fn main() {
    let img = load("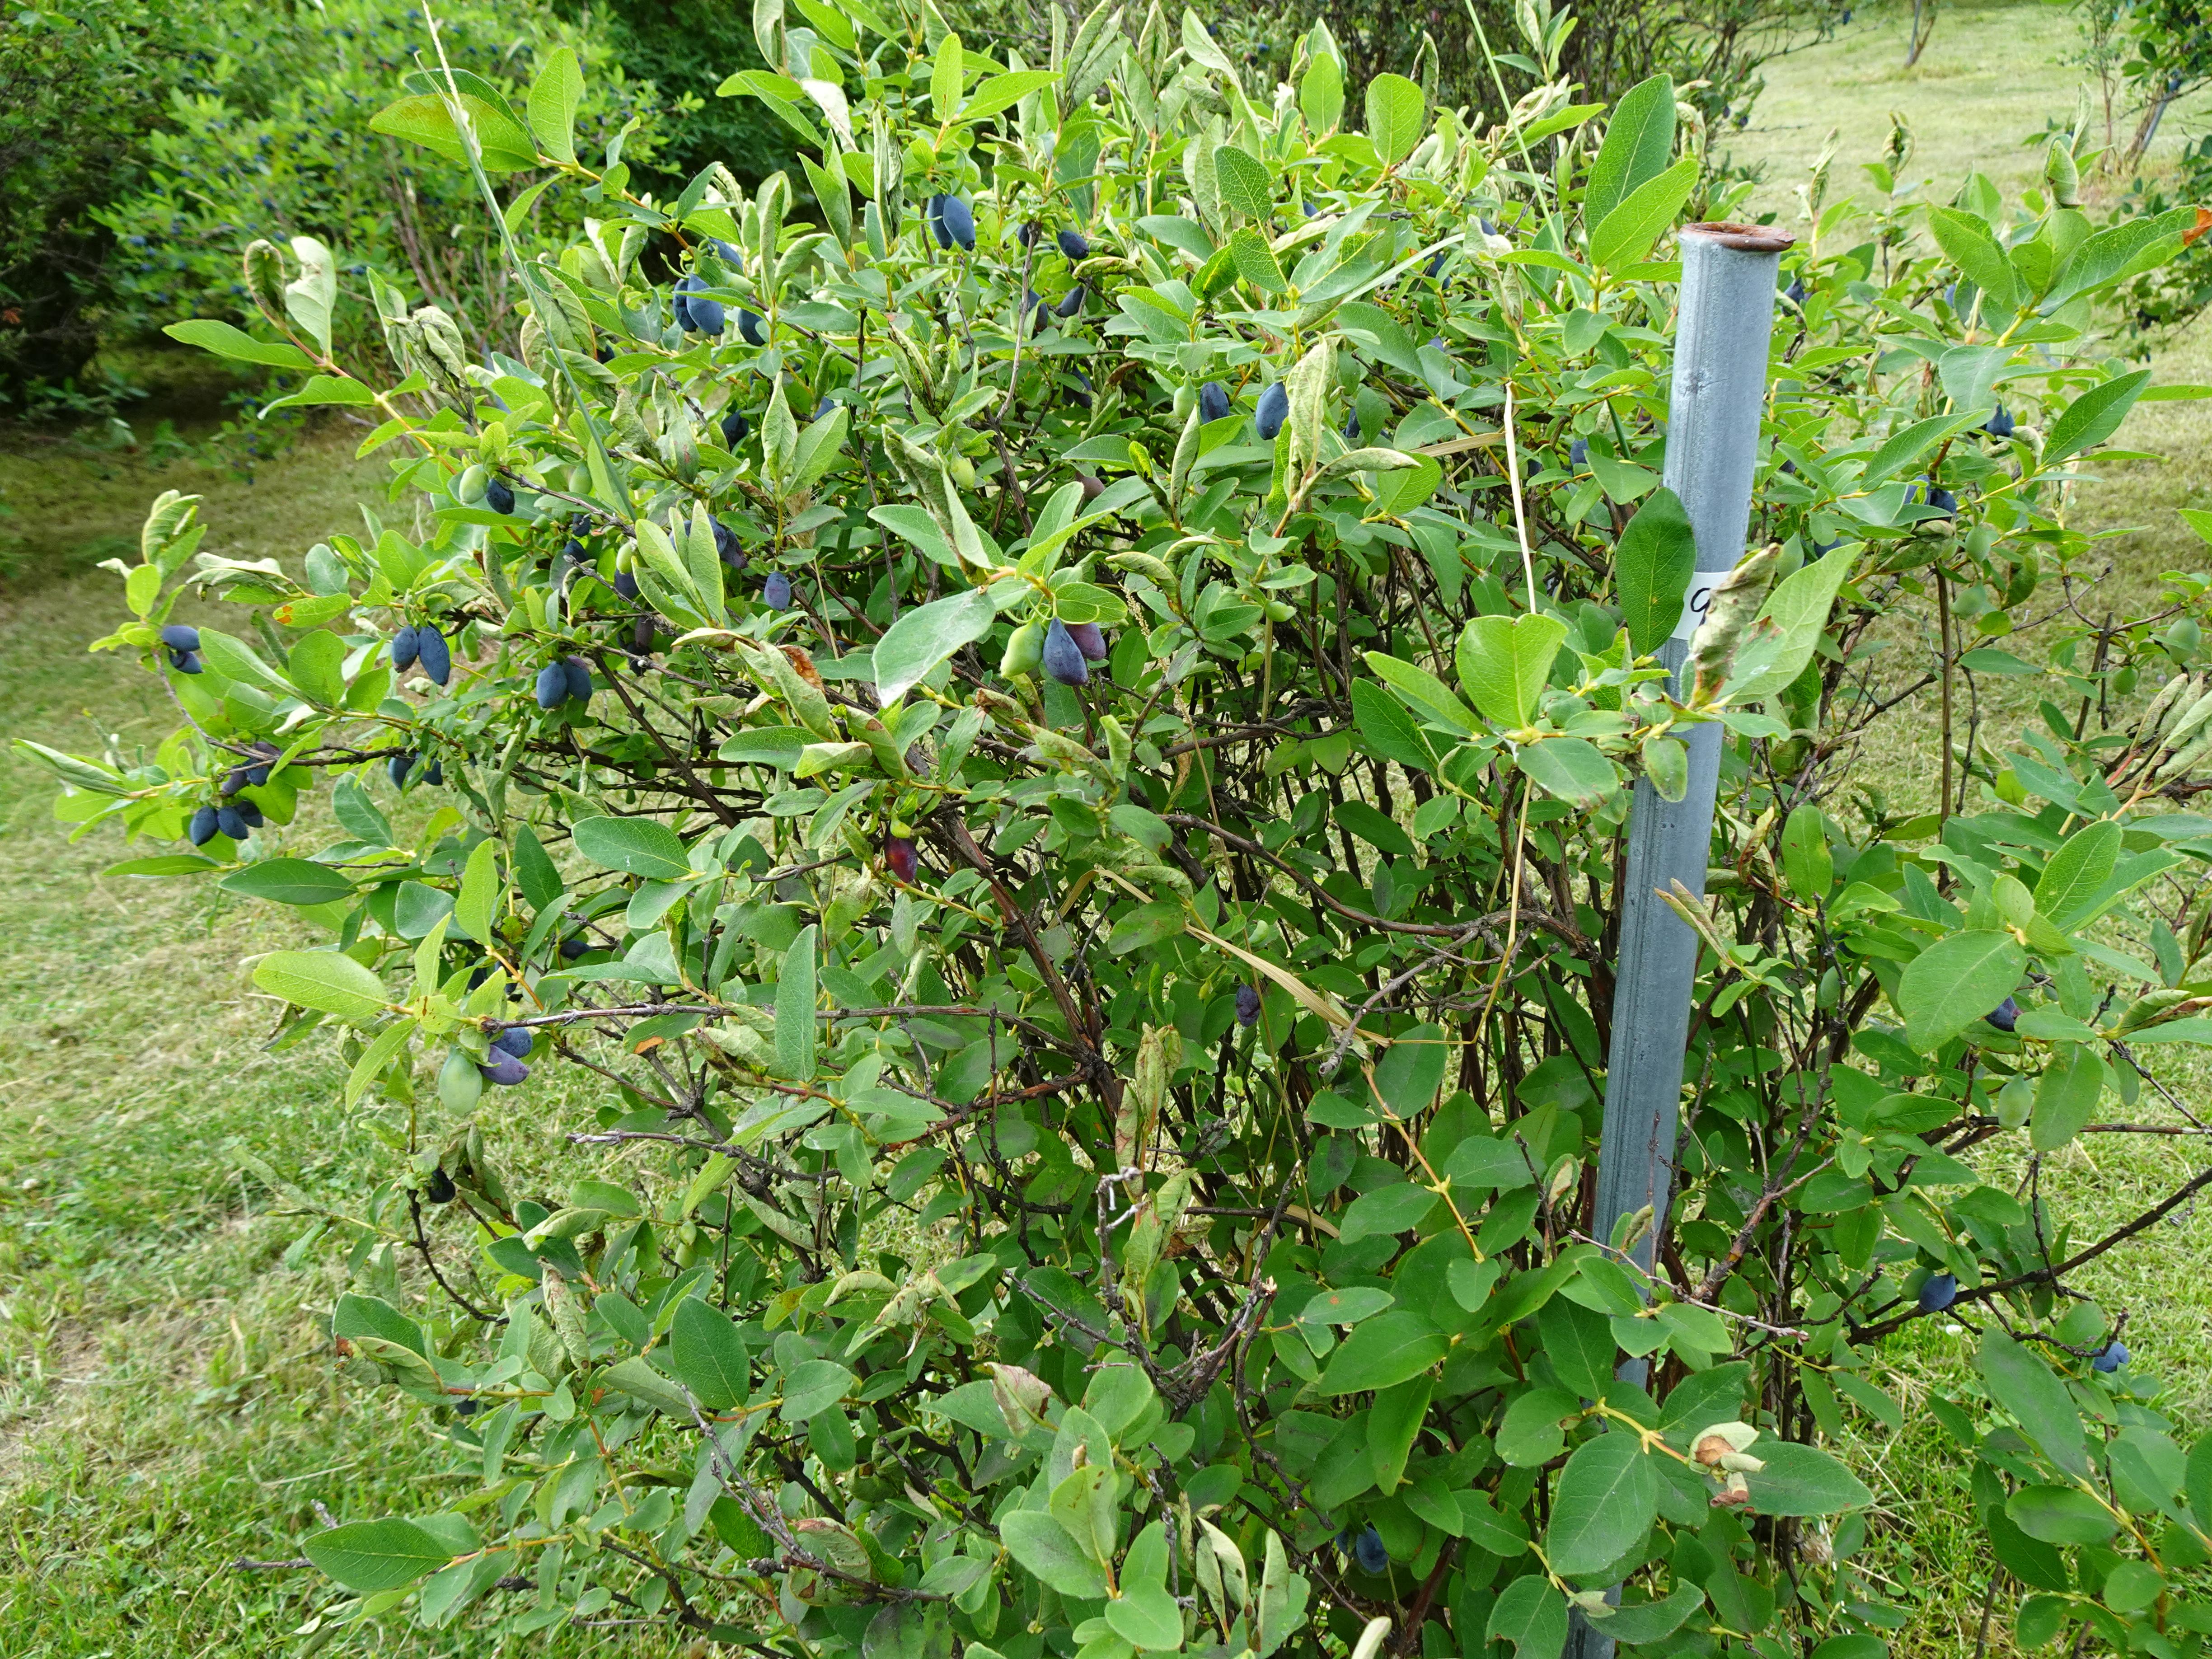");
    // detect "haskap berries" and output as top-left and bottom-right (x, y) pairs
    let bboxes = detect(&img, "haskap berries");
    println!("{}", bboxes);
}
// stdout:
(1569, 436), (1590, 466)
(740, 299), (768, 347)
(1054, 285), (1087, 317)
(391, 622), (420, 674)
(1922, 1274), (1957, 1312)
(1359, 1528), (1388, 1572)
(1814, 535), (1843, 560)
(1017, 285), (1045, 328)
(1346, 409), (1360, 438)
(465, 960), (485, 991)
(221, 764), (245, 798)
(1902, 475), (1934, 504)
(1900, 1267), (1936, 1300)
(1171, 375), (1197, 419)
(1262, 602), (1296, 622)
(1965, 525), (1992, 563)
(686, 276), (725, 338)
(560, 941), (590, 960)
(423, 758), (443, 785)
(570, 512), (592, 538)
(1057, 230), (1088, 260)
(1200, 380), (1235, 430)
(1335, 1521), (1358, 1559)
(944, 196), (977, 252)
(928, 195), (954, 251)
(389, 747), (416, 791)
(720, 410), (747, 448)
(1428, 255), (1451, 290)
(584, 342), (613, 365)
(1782, 281), (1805, 315)
(1986, 993), (2022, 1032)
(190, 806), (218, 844)
(427, 1167), (455, 1203)
(673, 276), (701, 335)
(636, 615), (654, 646)
(1340, 428), (1347, 437)
(764, 567), (791, 611)
(538, 660), (568, 708)
(1303, 201), (1316, 219)
(1018, 221), (1040, 246)
(2091, 1340), (2129, 1375)
(627, 642), (653, 677)
(1000, 612), (1048, 676)
(495, 955), (520, 995)
(1985, 404), (2013, 445)
(708, 512), (728, 554)
(616, 544), (641, 573)
(477, 1045), (534, 1086)
(1796, 289), (1816, 323)
(885, 825), (917, 883)
(1527, 459), (1543, 479)
(459, 464), (486, 504)
(2113, 665), (2137, 696)
(1430, 337), (1443, 351)
(1965, 424), (1986, 440)
(482, 1023), (549, 1056)
(720, 528), (749, 570)
(1065, 620), (1107, 661)
(215, 805), (252, 843)
(1235, 985), (1260, 1026)
(1062, 371), (1074, 402)
(509, 994), (524, 1001)
(230, 795), (265, 828)
(570, 460), (592, 495)
(485, 475), (516, 515)
(566, 539), (588, 563)
(1480, 219), (1497, 237)
(245, 743), (270, 789)
(1254, 383), (1290, 441)
(670, 519), (691, 553)
(456, 1400), (480, 1414)
(160, 652), (204, 674)
(1945, 283), (1957, 309)
(1071, 366), (1092, 406)
(2167, 608), (2202, 665)
(811, 396), (840, 423)
(709, 237), (743, 271)
(561, 656), (594, 702)
(435, 1048), (478, 1123)
(161, 625), (205, 652)
(1925, 486), (1958, 522)
(1043, 616), (1089, 685)
(417, 622), (450, 688)
(1953, 578), (1988, 617)
(1943, 537), (1959, 562)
